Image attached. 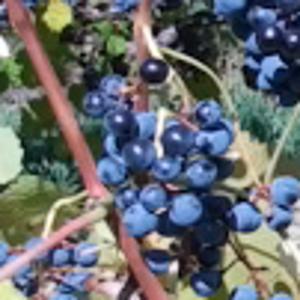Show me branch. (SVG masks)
Segmentation results:
<instances>
[{
	"label": "branch",
	"instance_id": "1",
	"mask_svg": "<svg viewBox=\"0 0 300 300\" xmlns=\"http://www.w3.org/2000/svg\"><path fill=\"white\" fill-rule=\"evenodd\" d=\"M6 9L34 77L54 113H56L62 134L69 145L79 169L78 175L81 178L86 193L93 198L103 199V205L86 211L79 217L62 225L38 245L17 256L4 267H1L0 280H8L52 246L70 237L72 234L83 230L90 224L104 220L107 223L108 229L113 233L126 264L144 291L149 296L162 297L164 295V288L153 276L142 259L138 242L133 237L124 235L122 231V211L113 207L112 192L109 189L103 188L98 181L96 164L86 140L79 129L75 112L50 70V66L32 28L31 21L22 1L8 0Z\"/></svg>",
	"mask_w": 300,
	"mask_h": 300
},
{
	"label": "branch",
	"instance_id": "2",
	"mask_svg": "<svg viewBox=\"0 0 300 300\" xmlns=\"http://www.w3.org/2000/svg\"><path fill=\"white\" fill-rule=\"evenodd\" d=\"M153 19V7L150 0H139L136 4L133 26V49L141 60H148L150 52L147 48L145 27L151 25Z\"/></svg>",
	"mask_w": 300,
	"mask_h": 300
},
{
	"label": "branch",
	"instance_id": "3",
	"mask_svg": "<svg viewBox=\"0 0 300 300\" xmlns=\"http://www.w3.org/2000/svg\"><path fill=\"white\" fill-rule=\"evenodd\" d=\"M135 93L133 96V105L137 112H142L149 108V88L141 81L134 82Z\"/></svg>",
	"mask_w": 300,
	"mask_h": 300
}]
</instances>
